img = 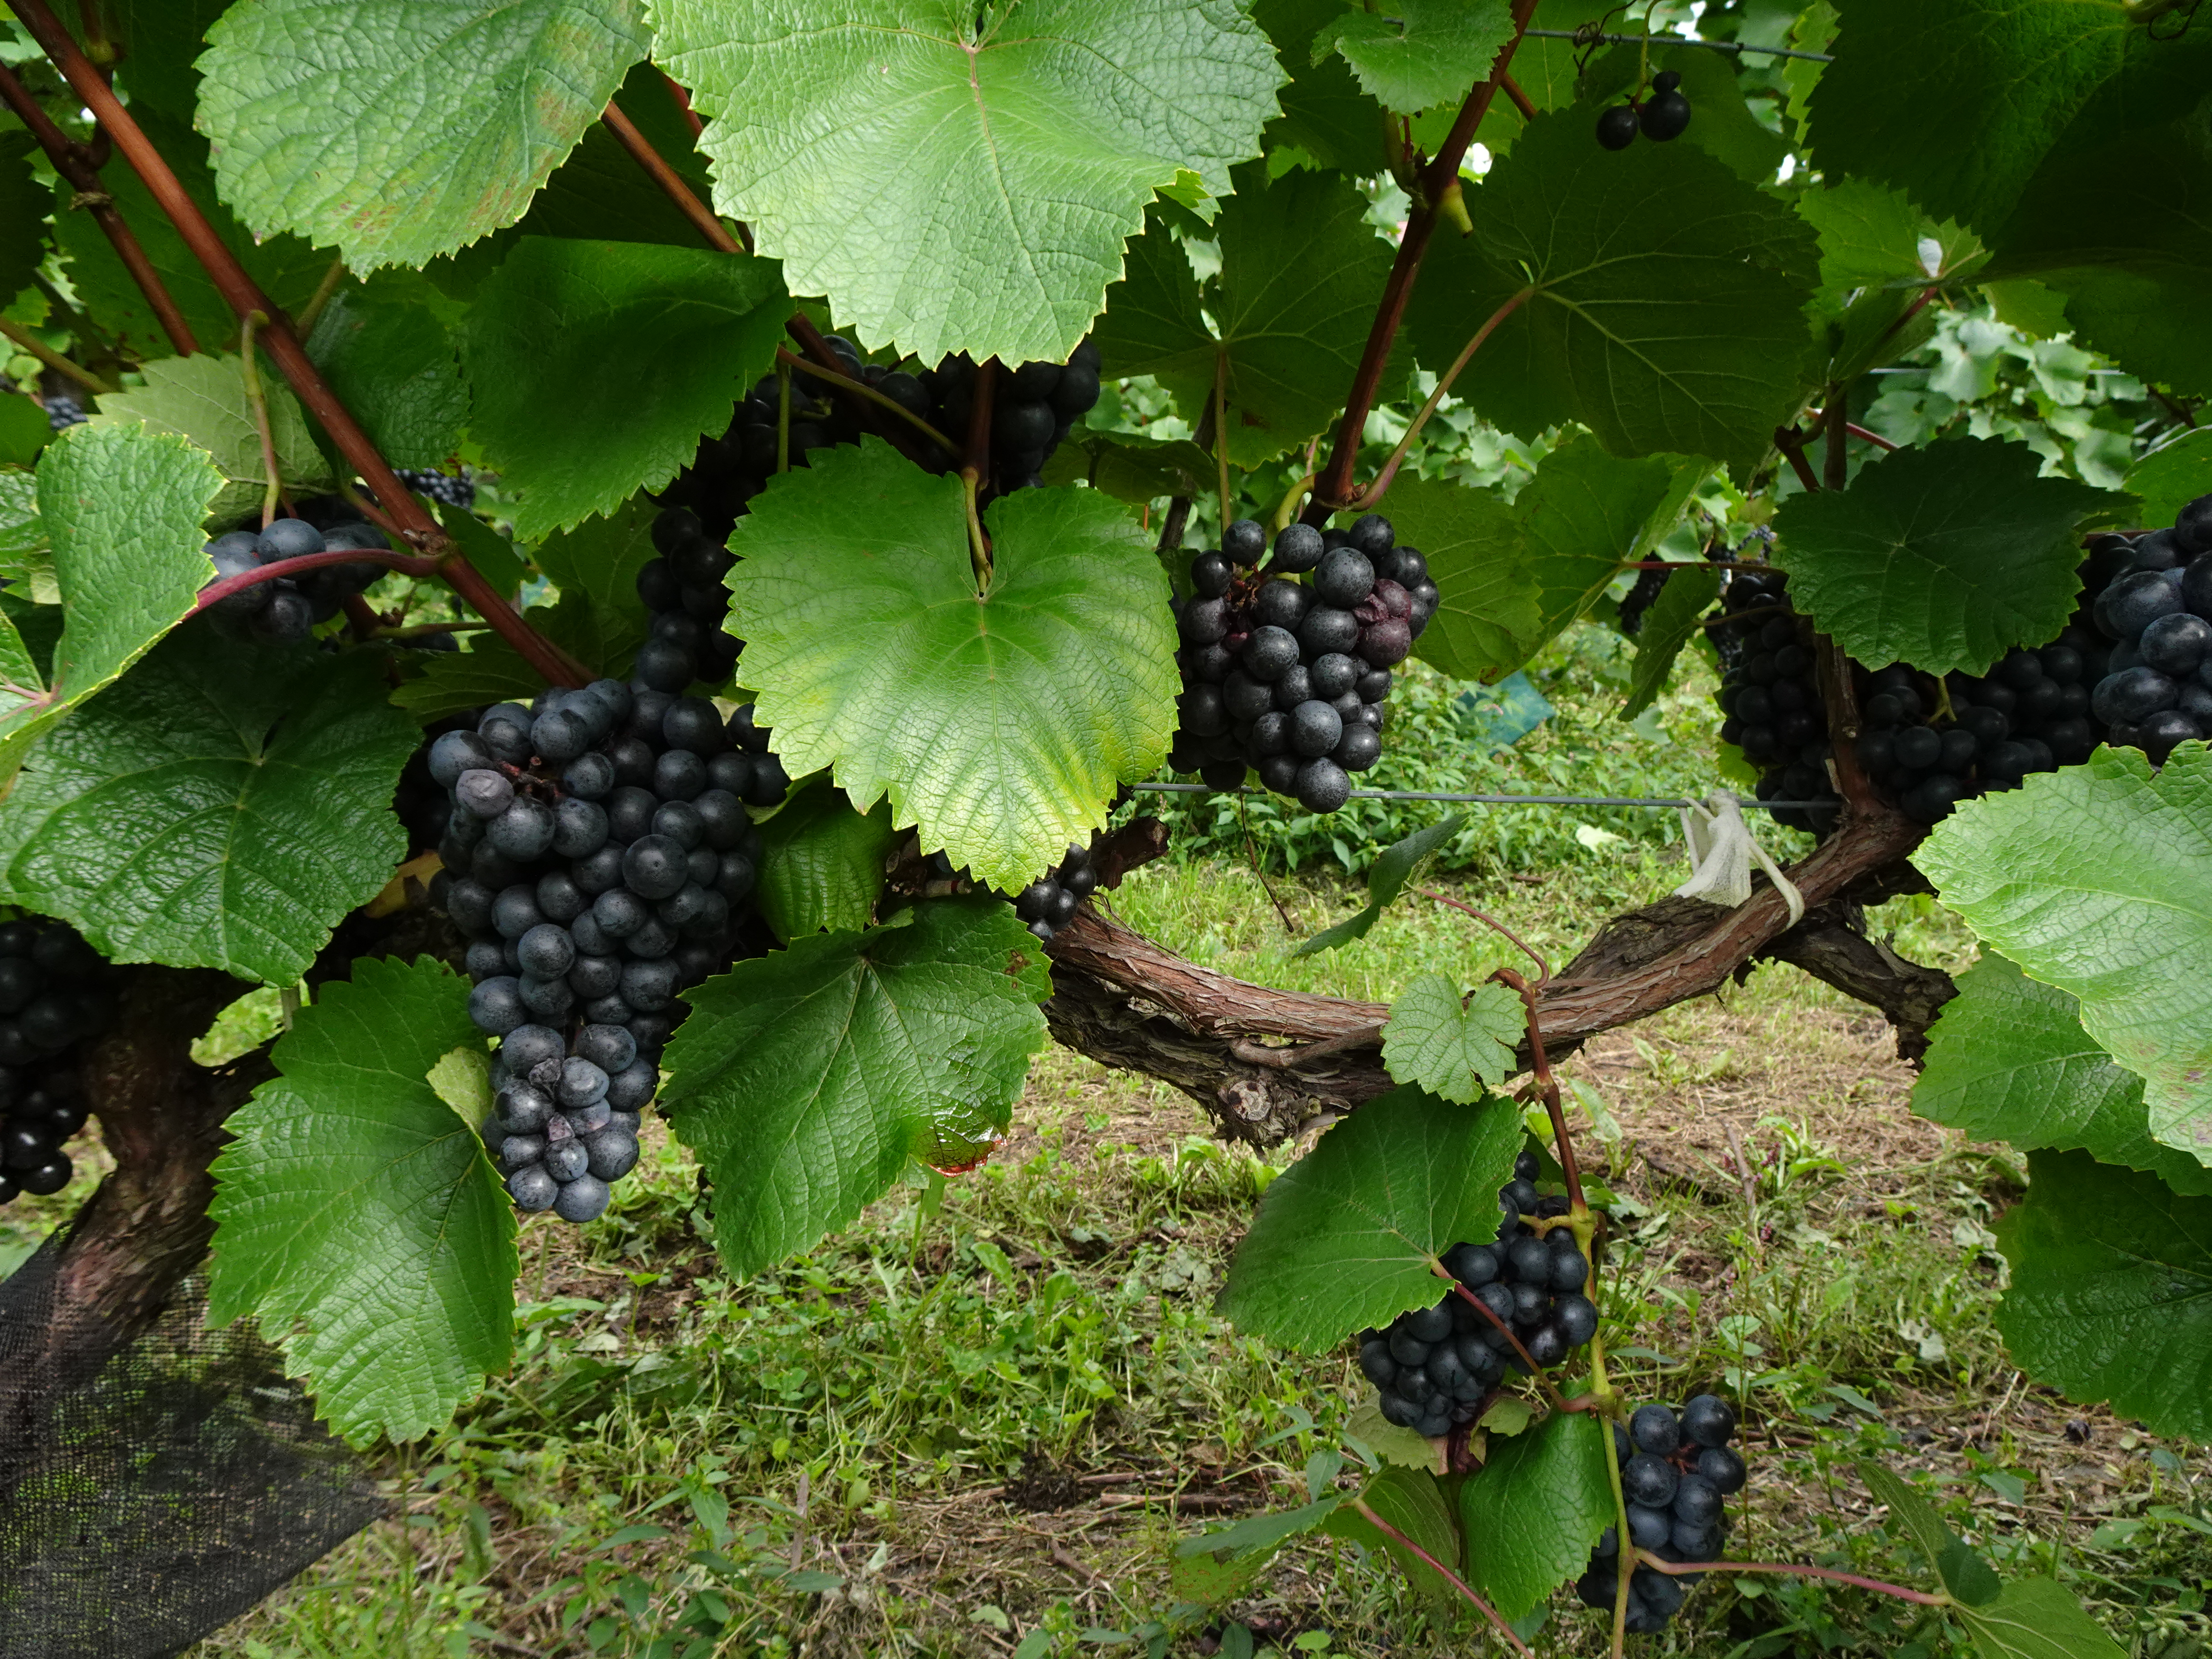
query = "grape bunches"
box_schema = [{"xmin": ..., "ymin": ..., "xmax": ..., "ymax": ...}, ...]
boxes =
[
  {"xmin": 2093, "ymin": 493, "xmax": 2212, "ymax": 768},
  {"xmin": 1359, "ymin": 1294, "xmax": 1507, "ymax": 1437},
  {"xmin": 1943, "ymin": 624, "xmax": 2090, "ymax": 770},
  {"xmin": 1591, "ymin": 1395, "xmax": 1746, "ymax": 1557},
  {"xmin": 641, "ymin": 390, "xmax": 779, "ymax": 545},
  {"xmin": 918, "ymin": 335, "xmax": 1100, "ymax": 496},
  {"xmin": 389, "ymin": 623, "xmax": 499, "ymax": 866},
  {"xmin": 1596, "ymin": 71, "xmax": 1692, "ymax": 151},
  {"xmin": 1578, "ymin": 1540, "xmax": 1725, "ymax": 1633},
  {"xmin": 429, "ymin": 678, "xmax": 792, "ymax": 1222},
  {"xmin": 1453, "ymin": 1150, "xmax": 1597, "ymax": 1377},
  {"xmin": 1016, "ymin": 841, "xmax": 1096, "ymax": 950},
  {"xmin": 1721, "ymin": 571, "xmax": 1841, "ymax": 848},
  {"xmin": 1164, "ymin": 733, "xmax": 1248, "ymax": 792},
  {"xmin": 198, "ymin": 518, "xmax": 392, "ymax": 649},
  {"xmin": 1854, "ymin": 659, "xmax": 2052, "ymax": 825},
  {"xmin": 0, "ymin": 910, "xmax": 132, "ymax": 1206},
  {"xmin": 636, "ymin": 507, "xmax": 748, "ymax": 694},
  {"xmin": 756, "ymin": 326, "xmax": 930, "ymax": 468},
  {"xmin": 1170, "ymin": 514, "xmax": 1440, "ymax": 813}
]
